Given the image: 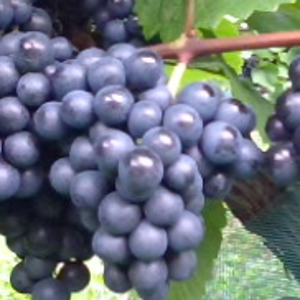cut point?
Segmentation results:
<instances>
[{"label": "cut point", "mask_w": 300, "mask_h": 300, "mask_svg": "<svg viewBox=\"0 0 300 300\" xmlns=\"http://www.w3.org/2000/svg\"><path fill=\"white\" fill-rule=\"evenodd\" d=\"M188 63H182L178 61L174 69L172 70L171 77L167 82L168 88L173 92H178L182 77L187 69Z\"/></svg>", "instance_id": "cut-point-1"}]
</instances>
